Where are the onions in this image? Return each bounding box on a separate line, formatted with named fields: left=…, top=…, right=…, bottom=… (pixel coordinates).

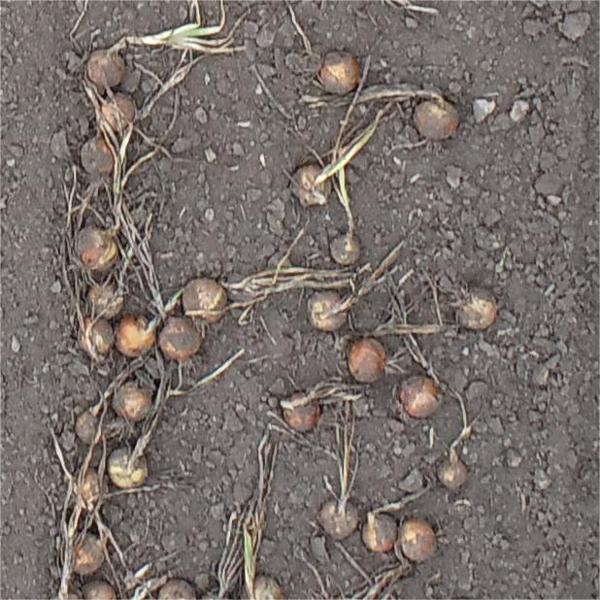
left=416, top=97, right=456, bottom=139
left=88, top=48, right=125, bottom=88
left=402, top=517, right=437, bottom=562
left=249, top=574, right=284, bottom=600
left=75, top=471, right=109, bottom=508
left=281, top=394, right=318, bottom=431
left=184, top=277, right=225, bottom=322
left=80, top=579, right=117, bottom=600
left=318, top=50, right=359, bottom=92
left=362, top=512, right=397, bottom=551
left=107, top=449, right=145, bottom=488
left=101, top=94, right=133, bottom=130
left=435, top=454, right=468, bottom=488
left=113, top=382, right=149, bottom=417
left=330, top=234, right=358, bottom=262
left=74, top=227, right=116, bottom=269
left=158, top=579, right=196, bottom=600
left=155, top=316, right=201, bottom=360
left=398, top=376, right=440, bottom=416
left=290, top=166, right=327, bottom=206
left=343, top=337, right=385, bottom=381
left=81, top=321, right=111, bottom=353
left=75, top=409, right=103, bottom=444
left=86, top=284, right=119, bottom=317
left=457, top=292, right=494, bottom=329
left=318, top=497, right=358, bottom=538
left=114, top=316, right=156, bottom=354
left=78, top=138, right=114, bottom=174
left=308, top=293, right=350, bottom=330
left=71, top=536, right=103, bottom=572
